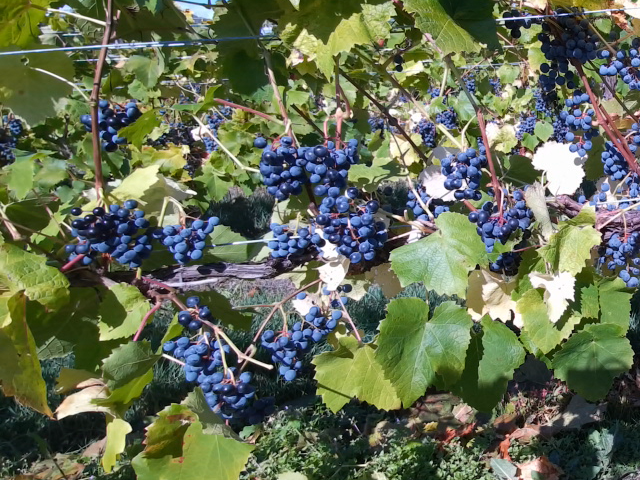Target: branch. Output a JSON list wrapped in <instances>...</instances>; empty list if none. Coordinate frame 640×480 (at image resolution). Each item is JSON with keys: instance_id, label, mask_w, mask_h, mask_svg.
Here are the masks:
<instances>
[{"instance_id": "5", "label": "branch", "mask_w": 640, "mask_h": 480, "mask_svg": "<svg viewBox=\"0 0 640 480\" xmlns=\"http://www.w3.org/2000/svg\"><path fill=\"white\" fill-rule=\"evenodd\" d=\"M323 279L322 278H317L303 286H301L299 289L291 292L285 299H283L282 301L278 302L272 309H270L267 314L265 315L259 329L258 332L254 335V337L252 338V342L256 343L257 340L262 336L264 329L266 328V325L268 324V321L270 320V317L276 313L281 307H283L285 304L289 303L294 297H296L297 295L301 294L302 292L306 291L307 289L314 287L316 285H318L319 283H322Z\"/></svg>"}, {"instance_id": "7", "label": "branch", "mask_w": 640, "mask_h": 480, "mask_svg": "<svg viewBox=\"0 0 640 480\" xmlns=\"http://www.w3.org/2000/svg\"><path fill=\"white\" fill-rule=\"evenodd\" d=\"M262 51L264 53L265 62L267 64V68H268L267 78H268V81H269L270 89L274 94V99H275L276 105H277V107L279 109L281 120L283 121L282 125L286 126L287 125L286 113H285L284 107H283L281 99L279 97V92H278V90H277V88L275 86L274 79H273V76H272V74H273V66H272V62L270 60L269 50L267 49L266 46H263L262 47Z\"/></svg>"}, {"instance_id": "2", "label": "branch", "mask_w": 640, "mask_h": 480, "mask_svg": "<svg viewBox=\"0 0 640 480\" xmlns=\"http://www.w3.org/2000/svg\"><path fill=\"white\" fill-rule=\"evenodd\" d=\"M106 55H107V50L102 48L99 52L98 59L95 65L94 74H93V91L89 99V107H90L89 115L92 118L91 138L93 141V152H94V158H95V166H94V171L96 175V182L94 186L95 190H99L100 187H103L105 184V181L103 180V172L101 169L102 155L100 150V138L98 135V125H99L98 118L99 117L97 116V113H98L97 109H98V97L100 93V76H101V71H102V67H103Z\"/></svg>"}, {"instance_id": "3", "label": "branch", "mask_w": 640, "mask_h": 480, "mask_svg": "<svg viewBox=\"0 0 640 480\" xmlns=\"http://www.w3.org/2000/svg\"><path fill=\"white\" fill-rule=\"evenodd\" d=\"M445 61L447 62V64L449 65V68L452 71V74L456 80V82L460 85V87L462 88V91L465 93L466 99L469 101L473 111L476 114V117L478 119V124L481 127V131H482V140H483V146L484 149L486 151V154L488 156V172L490 175V178L492 180V183L494 185V189H495V194H496V202L500 203L501 202V192H500V186L499 183L497 181V177L495 176V172L493 170V154L491 152V149L489 147L488 144V138H487V128L485 123L483 122V117L482 114L479 110V108L477 107L474 99L472 98L470 91L467 89V86L465 85V83L463 82V80L460 78L459 73L457 72L456 66L454 65V62L450 59L449 56L445 57Z\"/></svg>"}, {"instance_id": "1", "label": "branch", "mask_w": 640, "mask_h": 480, "mask_svg": "<svg viewBox=\"0 0 640 480\" xmlns=\"http://www.w3.org/2000/svg\"><path fill=\"white\" fill-rule=\"evenodd\" d=\"M572 62L575 70L578 72L580 78L583 81V87L585 91L590 95V103L595 112L597 121L602 127V131L605 133L607 138L615 145L616 149L624 157L625 161L629 164L632 171L634 173H637L639 169V164L633 152L629 149V145L627 141L621 136L620 131L618 130L614 119L610 116L607 109L604 107V104L597 97H595L594 91L590 89L587 81V76L584 74L582 68L579 66L578 60L576 58H573ZM601 112L603 116L606 118V120L610 123L611 129L614 132L616 138L608 130L607 125L602 119Z\"/></svg>"}, {"instance_id": "4", "label": "branch", "mask_w": 640, "mask_h": 480, "mask_svg": "<svg viewBox=\"0 0 640 480\" xmlns=\"http://www.w3.org/2000/svg\"><path fill=\"white\" fill-rule=\"evenodd\" d=\"M145 293L147 295H149V296H154V297H157V298H167V299L171 300L172 302H175L177 304L178 308L181 311H189L191 314H193L195 317H197L199 320H201L203 322L202 326L211 328L212 330H214V332L217 335H219L222 339H224L226 344H227V346L237 356H239L242 360H244L246 362H249V363H253V364L259 365L261 368H264V369H267V370H272L273 369V366L270 365V364H267V363L262 362L261 360L246 356L236 346L233 345L232 341L230 340V338L228 337L227 334H225L223 331L219 330V328L215 324L202 320L199 313H197L193 308L185 307L183 305V303L177 297H174L173 295H171L169 293H159V292H156V291H151L149 289H146Z\"/></svg>"}, {"instance_id": "8", "label": "branch", "mask_w": 640, "mask_h": 480, "mask_svg": "<svg viewBox=\"0 0 640 480\" xmlns=\"http://www.w3.org/2000/svg\"><path fill=\"white\" fill-rule=\"evenodd\" d=\"M113 28V0H108V14L105 21V36L102 43L109 44V38L112 37Z\"/></svg>"}, {"instance_id": "10", "label": "branch", "mask_w": 640, "mask_h": 480, "mask_svg": "<svg viewBox=\"0 0 640 480\" xmlns=\"http://www.w3.org/2000/svg\"><path fill=\"white\" fill-rule=\"evenodd\" d=\"M640 206V202H637L636 204H634L633 206L626 208L622 211H620V213L616 216H614L611 220H609L608 222H606L604 225L600 226L597 231H601L606 225L610 224L613 220L617 219L618 216L623 215L624 213H626L627 211L631 210V209H635L636 207Z\"/></svg>"}, {"instance_id": "6", "label": "branch", "mask_w": 640, "mask_h": 480, "mask_svg": "<svg viewBox=\"0 0 640 480\" xmlns=\"http://www.w3.org/2000/svg\"><path fill=\"white\" fill-rule=\"evenodd\" d=\"M336 102L335 123H336V139L335 146L339 147L341 142V122L343 120V112L341 109V92H340V56H335V90L333 92Z\"/></svg>"}, {"instance_id": "9", "label": "branch", "mask_w": 640, "mask_h": 480, "mask_svg": "<svg viewBox=\"0 0 640 480\" xmlns=\"http://www.w3.org/2000/svg\"><path fill=\"white\" fill-rule=\"evenodd\" d=\"M302 180L304 182V185H305V188H306L309 200H310L309 211L312 213L313 216H317L318 212L316 211L317 210V206H316V202H315V197L313 195L312 188H311V185H310V182L308 180L306 172L302 173Z\"/></svg>"}]
</instances>
